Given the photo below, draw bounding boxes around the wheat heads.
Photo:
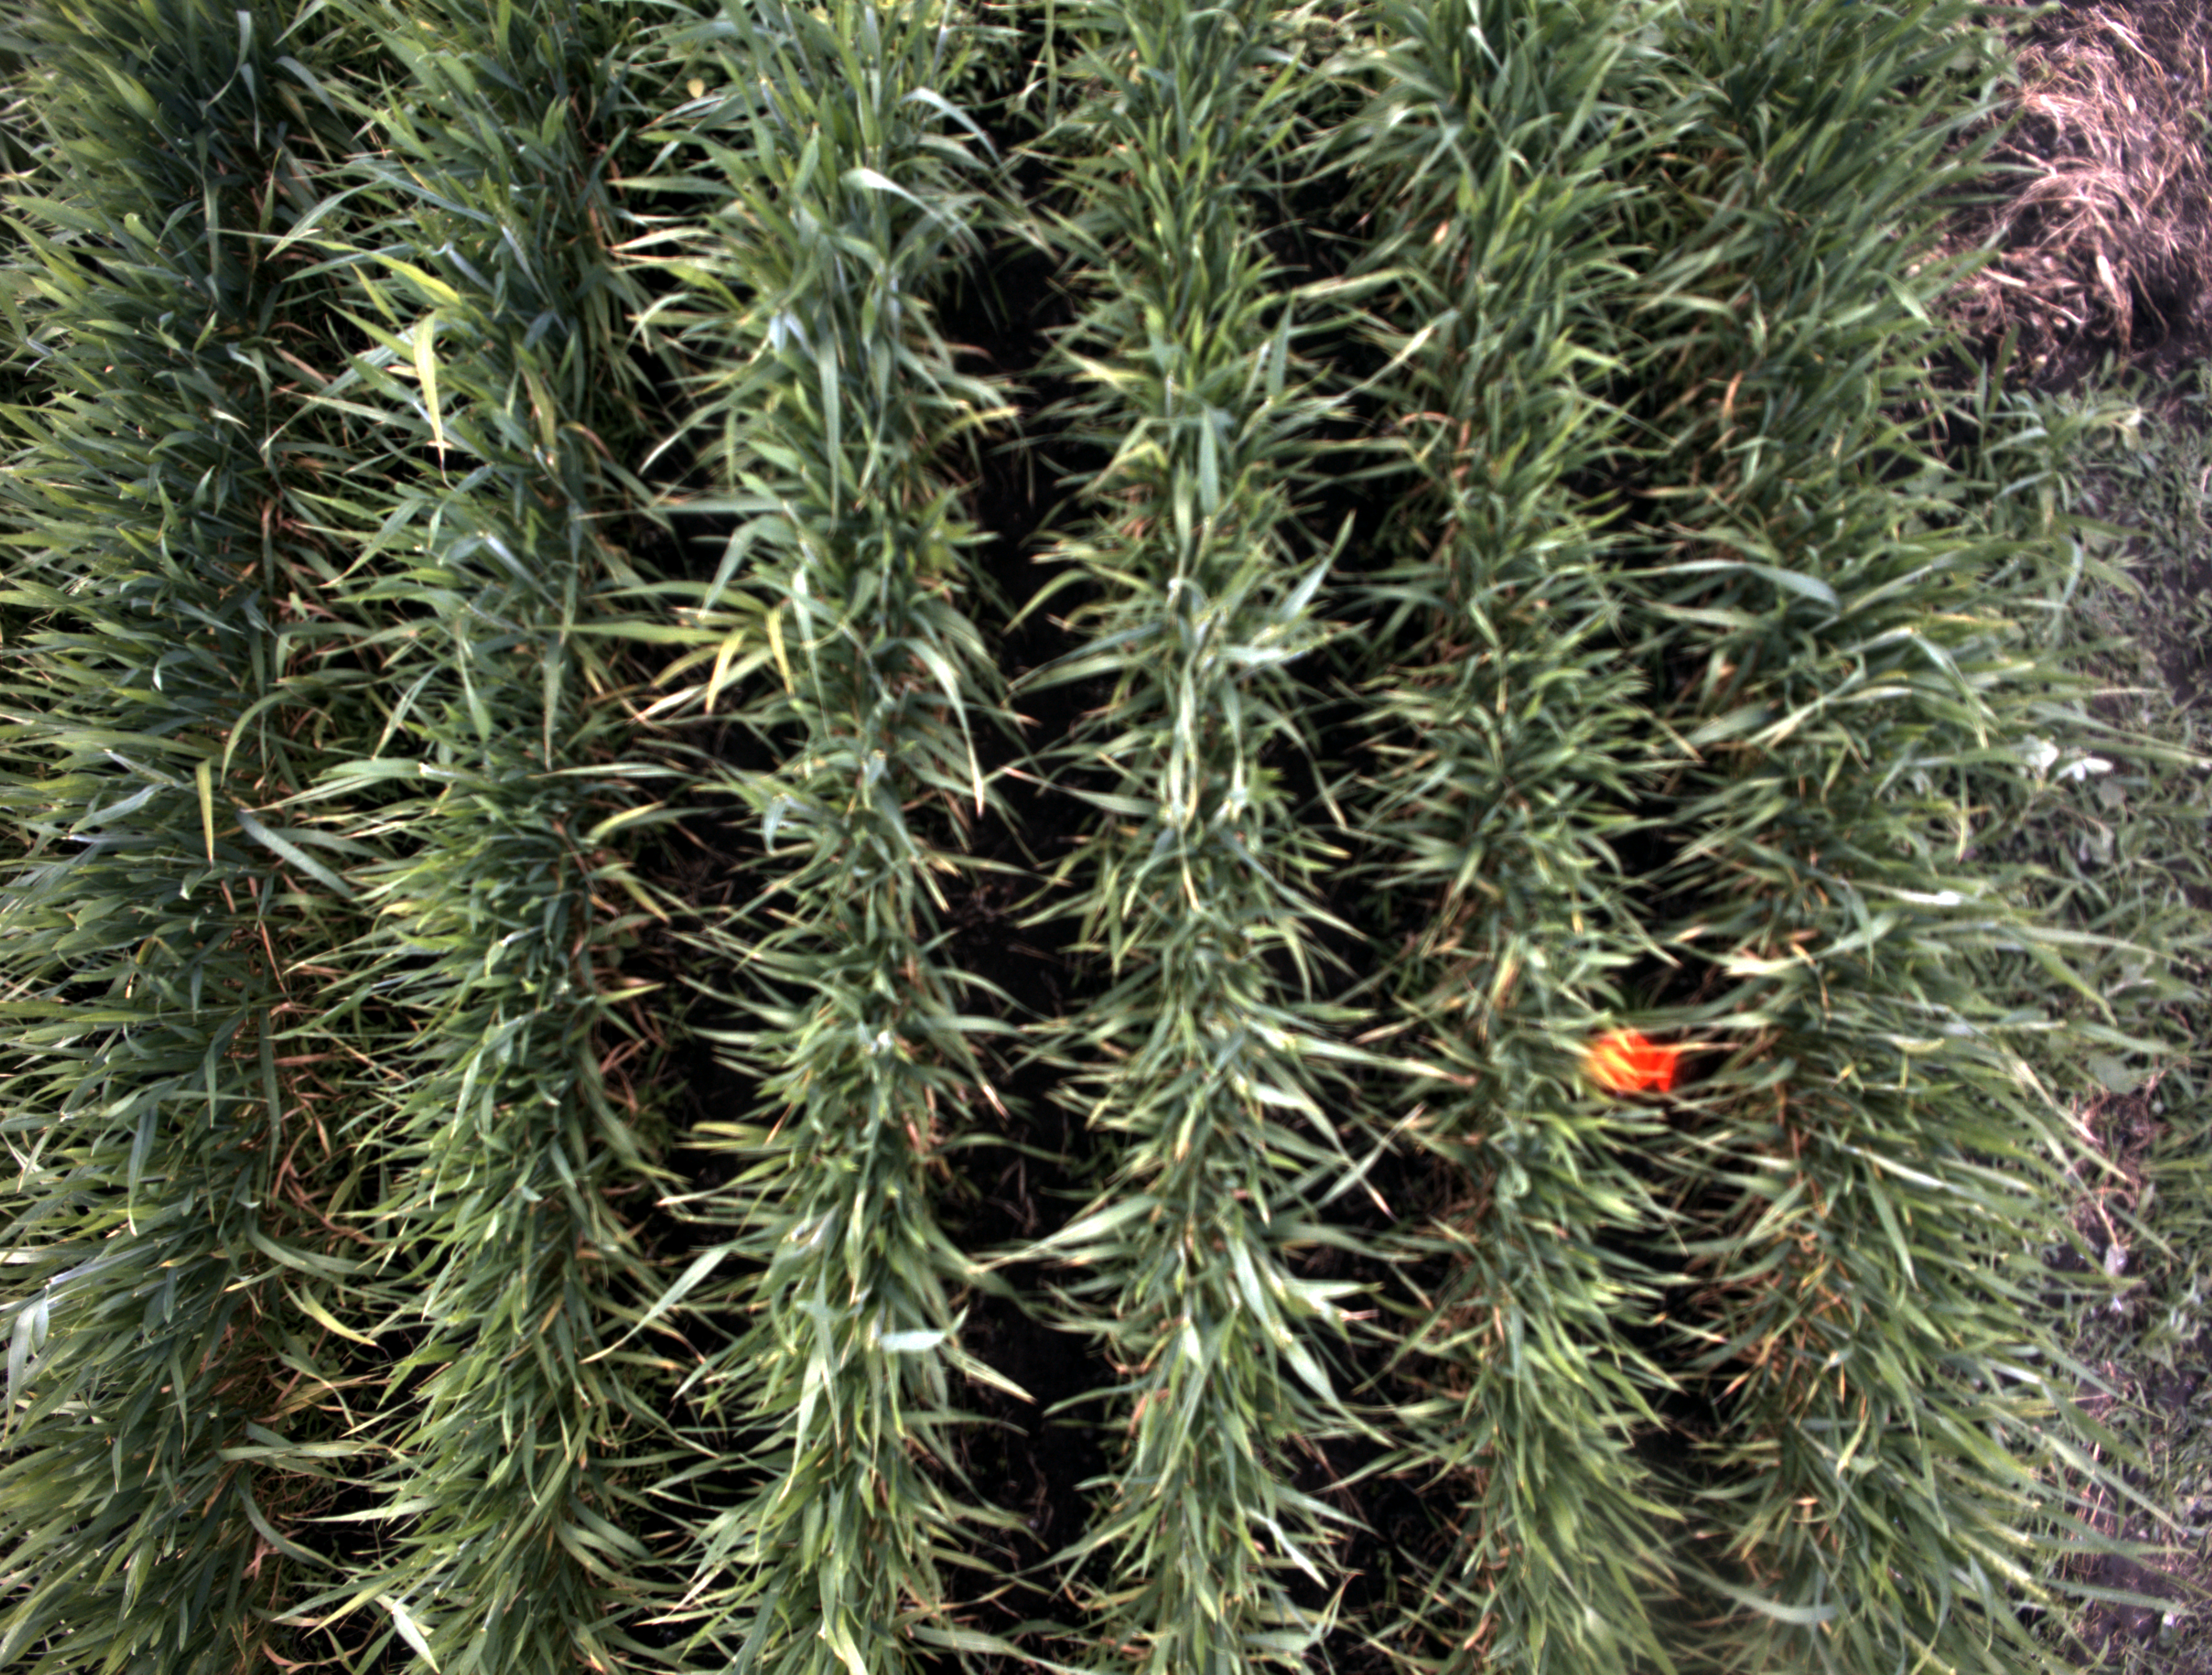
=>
[1978,1513,2038,1551]
[448,98,476,140]
[426,763,472,776]
[886,1306,896,1338]
[864,1315,879,1353]
[60,1102,115,1124]
[447,578,492,620]
[1241,398,1273,439]
[1966,1608,2064,1670]
[1885,159,1959,215]
[1901,1628,1953,1672]
[1205,1206,1233,1235]
[498,208,529,257]
[1957,1470,2041,1512]
[795,529,827,569]
[1203,1019,1229,1040]
[1268,1311,1289,1348]
[1958,1528,2050,1602]
[1979,1020,2070,1034]
[1168,367,1181,418]
[1245,835,1262,855]
[459,607,497,628]
[1499,719,1529,747]
[1201,513,1213,556]
[130,763,175,787]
